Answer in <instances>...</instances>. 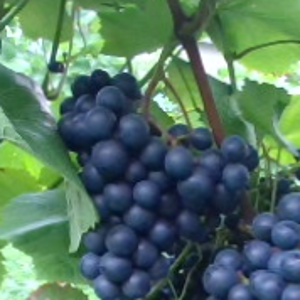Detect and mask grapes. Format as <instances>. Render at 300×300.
<instances>
[{
    "label": "grapes",
    "instance_id": "grapes-2",
    "mask_svg": "<svg viewBox=\"0 0 300 300\" xmlns=\"http://www.w3.org/2000/svg\"><path fill=\"white\" fill-rule=\"evenodd\" d=\"M256 239L223 249L202 274L206 300H300V192L253 222Z\"/></svg>",
    "mask_w": 300,
    "mask_h": 300
},
{
    "label": "grapes",
    "instance_id": "grapes-1",
    "mask_svg": "<svg viewBox=\"0 0 300 300\" xmlns=\"http://www.w3.org/2000/svg\"><path fill=\"white\" fill-rule=\"evenodd\" d=\"M71 94H72V96H68V97H66V98H65V99H64V100H63V101H62V102H61V103H60V104H59V114H60V115H61V117H59V118H58V119H57V120H56V127H57V129H58V132H59V133H60V135H61V136H62V138H63V139H64V140H65V141H66V146H67V147H68V148H69V149H70V150H72V151H77V161H78V165H79V166H80V167H83V168H82V169H81V173H80V178H81V180H82V182H83V183H84V184H85V187H86V189H87V190H88V192H89V194H90V197H91V199H92V201H93V203H94V205H95V206H96V208H97V210H98V211H99V214H100V216H101V220H100V221H99V222H98V223H97V224H96V226H95V228H90V229H89V230H88V231H86V232H84V233H83V234H82V236H81V244H82V245H83V247H84V248H85V249H86V251H85V252H84V253H83V256H82V259H81V261H80V263H79V272H80V273H81V274H82V275H83V276H85V278H86V279H87V280H89V281H90V282H91V285H92V287H93V288H94V290H95V294H96V295H97V296H98V297H99V298H100V299H101V300H115V299H116V298H117V297H119V298H121V299H123V300H139V299H142V298H145V297H146V296H147V295H148V294H149V292H150V280H152V279H157V278H165V277H166V276H167V274H168V272H169V269H170V267H171V265H172V258H171V257H170V256H167V254H172V255H175V254H179V253H180V252H181V243H182V242H183V239H182V237H183V238H196V237H197V236H198V235H199V234H200V232H201V229H202V219H201V217H200V214H199V213H198V212H199V209H202V210H204V211H207V212H210V213H217V214H220V215H231V214H232V213H233V212H234V211H235V210H236V209H237V208H238V196H240V195H243V194H244V193H245V189H246V186H247V185H248V183H249V182H250V180H251V177H252V171H253V170H254V169H255V168H256V166H257V165H258V164H259V154H258V150H257V149H256V148H255V147H254V146H253V145H252V144H251V143H249V142H248V141H247V140H246V139H244V138H243V137H242V136H241V135H240V134H231V135H228V136H227V137H226V138H225V139H224V140H223V141H222V144H221V147H220V146H213V147H210V148H208V147H209V146H210V145H211V143H212V133H211V131H210V130H209V129H207V128H205V127H199V128H198V127H195V128H194V129H193V131H189V132H188V130H187V127H186V126H185V125H184V124H183V123H175V124H172V125H170V126H169V127H168V128H167V137H168V139H169V140H170V142H171V144H172V145H173V146H174V147H173V148H172V147H171V146H170V145H169V144H168V142H167V141H166V140H165V139H164V138H163V137H162V132H161V130H160V128H159V126H158V125H156V124H155V123H153V122H151V121H149V122H145V121H144V120H143V115H142V114H139V113H138V108H139V103H140V100H141V96H142V87H141V85H140V83H139V82H138V80H137V79H136V78H135V77H134V76H133V75H132V74H130V73H127V72H121V73H118V74H115V75H113V76H111V75H110V74H109V73H108V72H107V71H106V70H102V69H95V70H93V71H92V72H91V73H90V75H79V76H77V77H76V78H75V80H74V81H73V83H72V84H71ZM191 139H192V141H193V142H194V144H195V145H196V146H198V147H200V148H201V149H205V150H204V151H203V152H202V153H201V154H200V155H199V156H194V155H192V154H191V152H190V151H189V150H188V149H187V147H188V146H189V145H190V143H191Z\"/></svg>",
    "mask_w": 300,
    "mask_h": 300
}]
</instances>
